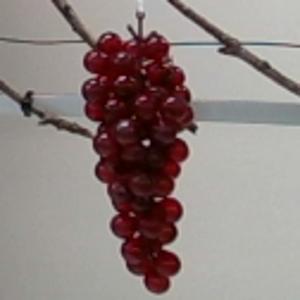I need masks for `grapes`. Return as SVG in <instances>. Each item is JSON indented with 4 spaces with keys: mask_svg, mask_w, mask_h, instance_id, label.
<instances>
[{
    "mask_svg": "<svg viewBox=\"0 0 300 300\" xmlns=\"http://www.w3.org/2000/svg\"><path fill=\"white\" fill-rule=\"evenodd\" d=\"M166 37L151 34L142 43L107 32L83 58L97 75L81 88L88 120L101 123L92 147L100 156L94 174L108 184L116 215L114 236L125 239L120 254L130 274L143 277L147 291L162 295L182 268L169 246L184 214L180 200L168 197L189 147L177 137L192 124V93L181 68L172 65Z\"/></svg>",
    "mask_w": 300,
    "mask_h": 300,
    "instance_id": "obj_1",
    "label": "grapes"
}]
</instances>
